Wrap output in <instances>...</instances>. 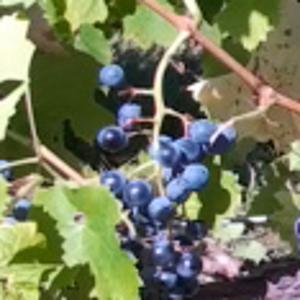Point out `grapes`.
<instances>
[{
  "instance_id": "obj_4",
  "label": "grapes",
  "mask_w": 300,
  "mask_h": 300,
  "mask_svg": "<svg viewBox=\"0 0 300 300\" xmlns=\"http://www.w3.org/2000/svg\"><path fill=\"white\" fill-rule=\"evenodd\" d=\"M32 209V203L30 199L21 197L13 202L11 206V216L13 220L22 222L26 220L28 214Z\"/></svg>"
},
{
  "instance_id": "obj_3",
  "label": "grapes",
  "mask_w": 300,
  "mask_h": 300,
  "mask_svg": "<svg viewBox=\"0 0 300 300\" xmlns=\"http://www.w3.org/2000/svg\"><path fill=\"white\" fill-rule=\"evenodd\" d=\"M126 68L114 60L100 64L95 71V79L99 85L108 90H121L127 84Z\"/></svg>"
},
{
  "instance_id": "obj_1",
  "label": "grapes",
  "mask_w": 300,
  "mask_h": 300,
  "mask_svg": "<svg viewBox=\"0 0 300 300\" xmlns=\"http://www.w3.org/2000/svg\"><path fill=\"white\" fill-rule=\"evenodd\" d=\"M238 139L237 128L203 118L186 135H153L147 146L151 159L126 176L105 170L97 177L99 187L132 212L122 246L139 256L149 283L165 300L193 299L201 292L202 261L192 251L207 241L209 227L179 210L181 202L207 187V154H228Z\"/></svg>"
},
{
  "instance_id": "obj_2",
  "label": "grapes",
  "mask_w": 300,
  "mask_h": 300,
  "mask_svg": "<svg viewBox=\"0 0 300 300\" xmlns=\"http://www.w3.org/2000/svg\"><path fill=\"white\" fill-rule=\"evenodd\" d=\"M144 120V110L135 100L120 103L114 112L116 125H108L97 130L95 143L97 147L108 153H122L129 149L132 143L133 130Z\"/></svg>"
}]
</instances>
